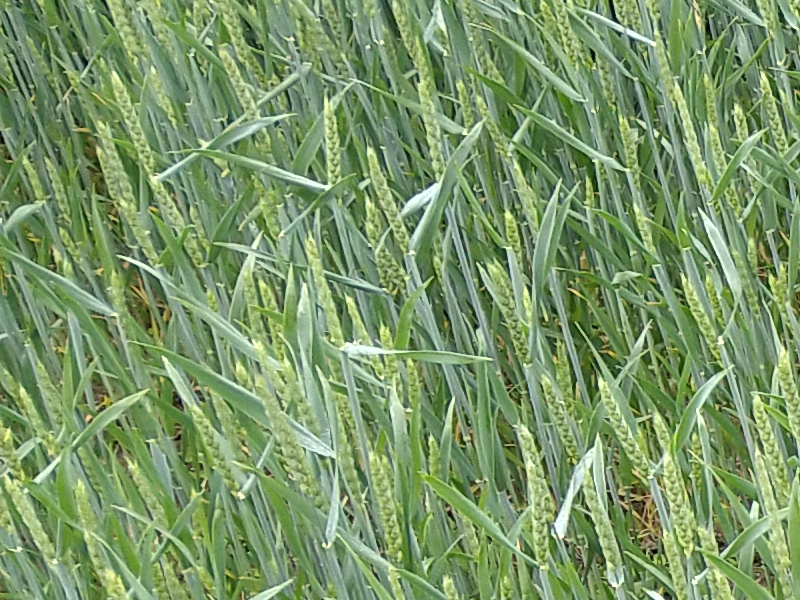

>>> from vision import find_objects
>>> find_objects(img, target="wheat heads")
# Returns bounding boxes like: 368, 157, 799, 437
253, 177, 280, 233
381, 25, 396, 73
77, 445, 100, 491
210, 388, 238, 445
599, 382, 649, 477
76, 484, 113, 592
571, 0, 585, 6
338, 423, 363, 496
678, 274, 723, 368
212, 0, 246, 61
756, 456, 789, 563
660, 530, 684, 600
461, 0, 483, 58
427, 437, 442, 479
189, 206, 208, 248
244, 271, 265, 339
322, 99, 341, 188
406, 360, 424, 413
67, 70, 86, 106
768, 543, 795, 600
381, 325, 402, 402
780, 265, 788, 300
98, 120, 135, 204
716, 576, 755, 600
273, 74, 288, 108
196, 50, 209, 74
309, 36, 322, 74
752, 393, 793, 493
585, 176, 595, 210
105, 0, 139, 61
484, 52, 504, 87
95, 145, 117, 200
191, 492, 204, 543
278, 129, 294, 165
416, 35, 434, 94
151, 181, 203, 267
778, 89, 791, 115
247, 45, 267, 86
701, 70, 717, 125
673, 82, 706, 183
443, 575, 474, 600
308, 236, 340, 344
329, 359, 358, 434
109, 270, 128, 333
116, 0, 172, 52
497, 576, 516, 600
9, 425, 26, 484
490, 263, 528, 358
248, 5, 257, 18
315, 20, 347, 81
517, 422, 554, 520
319, 0, 342, 39
116, 0, 146, 52
193, 2, 204, 38
290, 0, 311, 51
60, 229, 84, 264
698, 529, 720, 570
39, 361, 62, 430
436, 28, 450, 54
625, 0, 647, 54
364, 193, 393, 293
26, 34, 55, 87
733, 102, 747, 143
664, 456, 692, 538
197, 569, 214, 588
541, 380, 577, 463
432, 257, 444, 282
388, 574, 408, 600
581, 473, 622, 571
100, 59, 110, 75
236, 365, 253, 398
596, 161, 609, 183
731, 251, 760, 310
344, 295, 378, 371
22, 159, 44, 204
365, 143, 409, 251
207, 289, 221, 315
432, 229, 444, 258
259, 282, 287, 355
551, 0, 579, 69
743, 0, 776, 31
106, 569, 174, 600
507, 213, 520, 261
167, 567, 201, 600
281, 360, 314, 434
746, 238, 760, 272
508, 154, 538, 232
366, 225, 406, 282
123, 203, 159, 265
129, 462, 165, 530
757, 71, 788, 157
618, 113, 639, 184
767, 276, 787, 322
44, 155, 70, 215
219, 51, 270, 151
394, 0, 418, 66
369, 452, 405, 567
456, 81, 475, 132
524, 463, 550, 567
655, 413, 668, 451
476, 96, 508, 159
709, 125, 726, 173
596, 51, 614, 100
565, 0, 594, 65
633, 203, 654, 250
652, 28, 676, 103
0, 47, 18, 91
112, 70, 155, 175
704, 275, 731, 327
692, 433, 703, 491
556, 346, 575, 415
417, 80, 446, 180
255, 374, 322, 517
19, 386, 51, 450
779, 354, 800, 468
459, 512, 482, 554
188, 403, 237, 492
540, 0, 559, 32
6, 479, 56, 564
151, 66, 179, 122
154, 563, 173, 600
